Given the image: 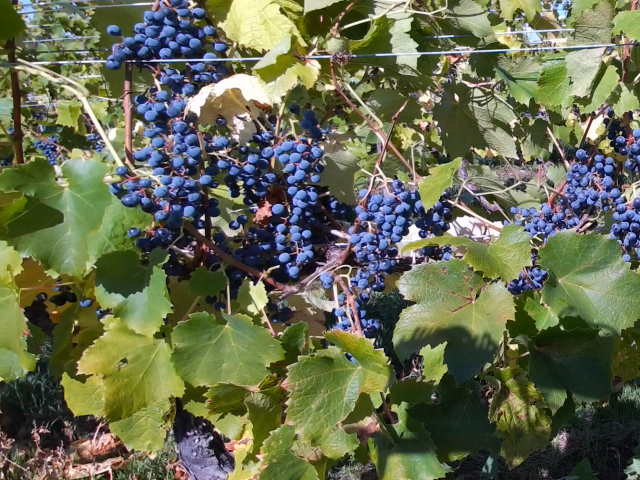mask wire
<instances>
[{"label":"wire","instance_id":"3","mask_svg":"<svg viewBox=\"0 0 640 480\" xmlns=\"http://www.w3.org/2000/svg\"><path fill=\"white\" fill-rule=\"evenodd\" d=\"M105 63L104 59L100 60H55V61H32V66H58V65H85V66H94V65H102Z\"/></svg>","mask_w":640,"mask_h":480},{"label":"wire","instance_id":"2","mask_svg":"<svg viewBox=\"0 0 640 480\" xmlns=\"http://www.w3.org/2000/svg\"><path fill=\"white\" fill-rule=\"evenodd\" d=\"M262 56H244L235 58H223V57H193V58H155V57H138L129 58L128 64L141 63V62H153L159 64L167 63H195V62H220V63H238L247 61H262Z\"/></svg>","mask_w":640,"mask_h":480},{"label":"wire","instance_id":"1","mask_svg":"<svg viewBox=\"0 0 640 480\" xmlns=\"http://www.w3.org/2000/svg\"><path fill=\"white\" fill-rule=\"evenodd\" d=\"M623 48L633 49L640 48V42L625 44V43H584V44H567L565 46H537V47H525V48H493L487 50H457L447 49L442 51H417V52H391L383 53L377 51L368 52H331L322 54H308L304 56L305 60L311 59H324L334 57H380V58H394V57H420V56H444L449 54L455 55H489L495 53H528V52H540V51H565L569 49H587V48Z\"/></svg>","mask_w":640,"mask_h":480}]
</instances>
